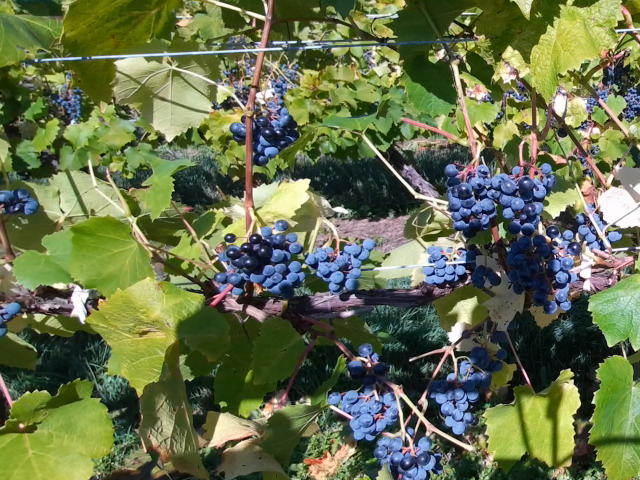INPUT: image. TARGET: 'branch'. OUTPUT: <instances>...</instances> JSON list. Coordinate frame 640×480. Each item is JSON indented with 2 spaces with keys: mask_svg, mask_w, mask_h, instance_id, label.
<instances>
[{
  "mask_svg": "<svg viewBox=\"0 0 640 480\" xmlns=\"http://www.w3.org/2000/svg\"><path fill=\"white\" fill-rule=\"evenodd\" d=\"M531 116H532V122H533V153H532V160L529 164V176L533 177L534 167L537 162V155H538V120H537V113H536V96L535 95L531 96Z\"/></svg>",
  "mask_w": 640,
  "mask_h": 480,
  "instance_id": "45aa463d",
  "label": "branch"
},
{
  "mask_svg": "<svg viewBox=\"0 0 640 480\" xmlns=\"http://www.w3.org/2000/svg\"><path fill=\"white\" fill-rule=\"evenodd\" d=\"M331 340L346 354H348L353 361L357 360L355 353L351 351L346 345H344L336 336H332Z\"/></svg>",
  "mask_w": 640,
  "mask_h": 480,
  "instance_id": "ea751061",
  "label": "branch"
},
{
  "mask_svg": "<svg viewBox=\"0 0 640 480\" xmlns=\"http://www.w3.org/2000/svg\"><path fill=\"white\" fill-rule=\"evenodd\" d=\"M264 62V54L259 52L257 54L256 63L253 70V79L250 90L246 98V126L244 131V157L246 160L245 165V177H244V203H245V222L246 231H249L250 224L252 222L251 216L248 212V206H253L251 200V180H252V167L253 158L251 155V133L253 129V100L257 92L260 73Z\"/></svg>",
  "mask_w": 640,
  "mask_h": 480,
  "instance_id": "325d2c04",
  "label": "branch"
},
{
  "mask_svg": "<svg viewBox=\"0 0 640 480\" xmlns=\"http://www.w3.org/2000/svg\"><path fill=\"white\" fill-rule=\"evenodd\" d=\"M491 320V317H487L486 319L480 321L479 323H477L474 327H472L464 336H461L453 345L450 346L449 350L447 351V353H445V355L441 358V360L438 362V366L435 368L434 374L432 375L431 379L429 380L427 387L425 389V391L423 392L421 398L418 400V403L415 405L413 403V401L410 399L409 395L404 391V389L402 387H399L398 385H396L393 382H390L385 376L381 375L380 373H378L377 371H375L371 366H366L365 370L368 371L372 376L376 377L377 379H379L380 381H382L386 386L395 389L397 388V391L399 392V394L404 398V400L406 401V403L412 408V410H410L408 412V414L406 415V418L404 420V426L405 429L407 430L408 424H409V417H411V415L415 412V414L424 422V424L436 435L441 436L443 439L447 440L448 442H451L455 445H459L461 447L467 448V449H471L472 445L470 443H466L464 441L455 439L453 437H450L449 435H447L445 432H443L442 430L437 429L429 420L428 418L419 410V406L421 405V403L423 402L425 396L428 394V391L430 389L431 384L433 383V381L435 380V378L437 377L438 371L441 369V365L443 364V362L445 361L446 358H448V356L452 353V350L457 347L461 341H463L464 339H467L470 334L472 332H474V330L478 329V327H480L481 325L487 323L488 321Z\"/></svg>",
  "mask_w": 640,
  "mask_h": 480,
  "instance_id": "30e6481e",
  "label": "branch"
},
{
  "mask_svg": "<svg viewBox=\"0 0 640 480\" xmlns=\"http://www.w3.org/2000/svg\"><path fill=\"white\" fill-rule=\"evenodd\" d=\"M274 17V0H267V14L266 20L264 22V31L263 36L260 41V46H267L270 34H271V24L273 23Z\"/></svg>",
  "mask_w": 640,
  "mask_h": 480,
  "instance_id": "982ccf7c",
  "label": "branch"
},
{
  "mask_svg": "<svg viewBox=\"0 0 640 480\" xmlns=\"http://www.w3.org/2000/svg\"><path fill=\"white\" fill-rule=\"evenodd\" d=\"M444 47L447 51V54L449 56V58L451 59L452 65H453V69H454V75H455V80H456V88H457V92H458V97H459V104L462 110V113L464 114V120H465V125L467 128V133H468V137H469V144L471 145L472 148V155L474 156L475 150L477 148L476 144L472 143V140L474 139V134H473V130H472V126H471V122H470V117H469V111L466 108V104L464 101V95H463V90H462V85H461V78H460V72H459V64L457 62V59L451 49V46L449 44H444Z\"/></svg>",
  "mask_w": 640,
  "mask_h": 480,
  "instance_id": "170604dd",
  "label": "branch"
},
{
  "mask_svg": "<svg viewBox=\"0 0 640 480\" xmlns=\"http://www.w3.org/2000/svg\"><path fill=\"white\" fill-rule=\"evenodd\" d=\"M419 4L421 6L422 12L423 14L426 16L427 21H428V25L431 28V30L437 35V39H442V33L440 32V30L436 27V25L433 22L432 16L429 13L427 6L424 2V0H419Z\"/></svg>",
  "mask_w": 640,
  "mask_h": 480,
  "instance_id": "1ff4a987",
  "label": "branch"
}]
</instances>
